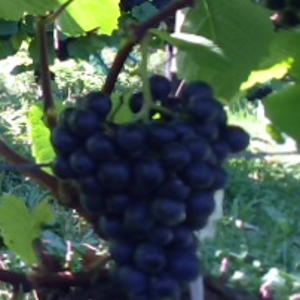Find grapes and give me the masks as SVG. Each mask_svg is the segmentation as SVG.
<instances>
[{"label":"grapes","instance_id":"grapes-1","mask_svg":"<svg viewBox=\"0 0 300 300\" xmlns=\"http://www.w3.org/2000/svg\"><path fill=\"white\" fill-rule=\"evenodd\" d=\"M211 94L206 81L172 84L155 75L131 97L126 125L107 119L111 100L93 91L51 131L54 173L83 189L81 208L102 214L100 230L114 239L110 282L118 300H175L181 282L200 273L193 231L208 222L211 193L229 183L221 164L249 142L243 127L226 125Z\"/></svg>","mask_w":300,"mask_h":300}]
</instances>
